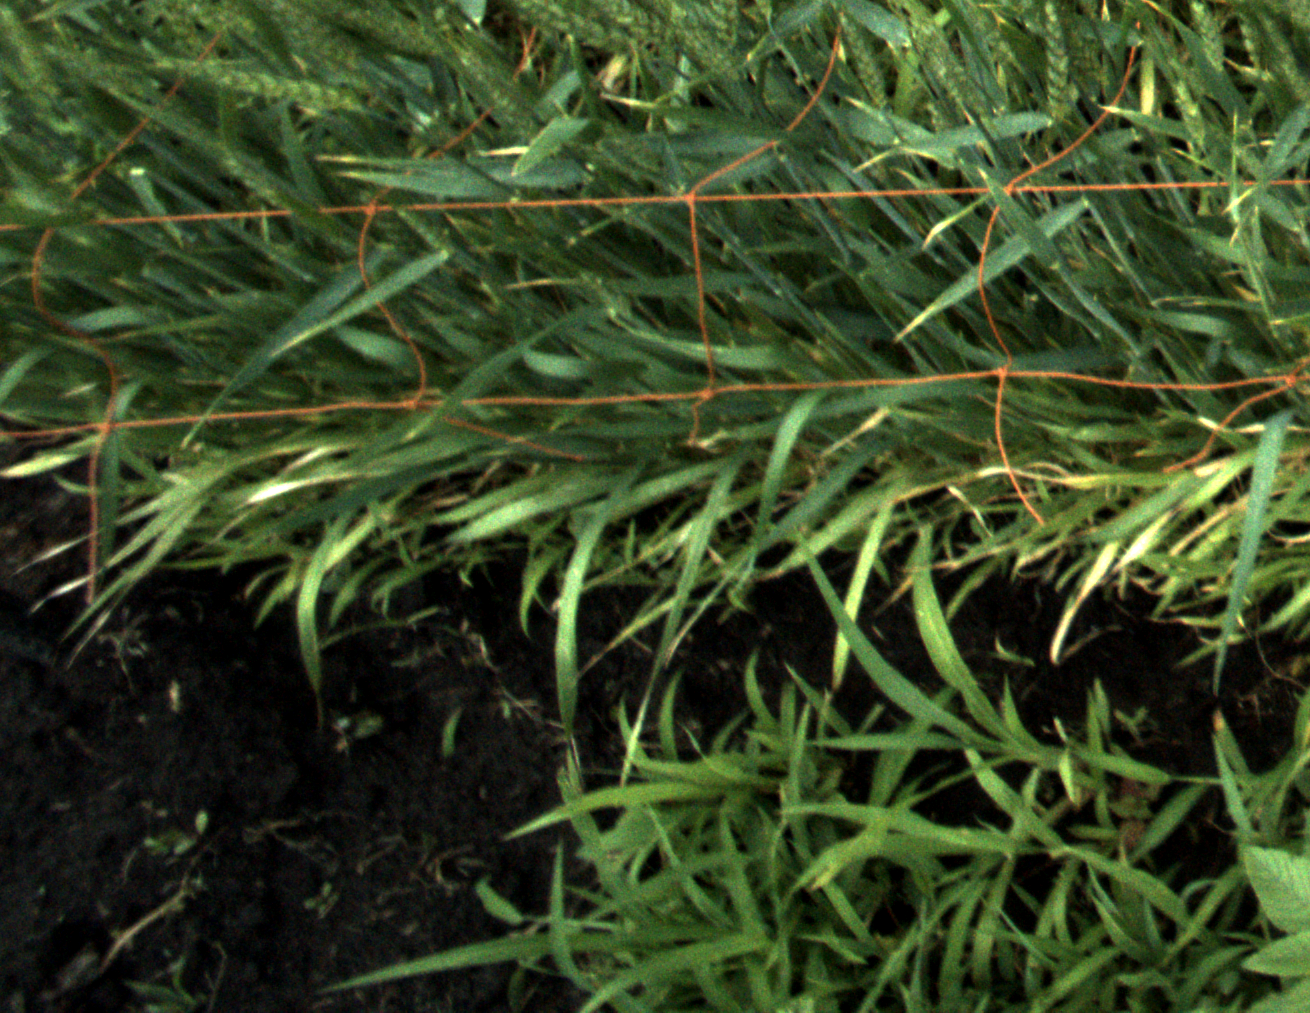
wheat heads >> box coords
[887,0,933,24]
[924,98,950,131]
[502,0,640,58]
[484,84,524,119]
[190,0,241,16]
[153,56,222,74]
[1191,0,1225,70]
[209,72,357,110]
[963,0,1015,58]
[1176,76,1207,138]
[1228,138,1268,182]
[1058,12,1106,78]
[219,145,282,207]
[150,0,213,57]
[1041,0,1068,113]
[247,0,361,68]
[1227,0,1262,63]
[397,206,447,250]
[134,0,225,35]
[837,10,887,111]
[1260,18,1310,110]
[695,0,740,49]
[0,7,61,105]
[549,0,678,44]
[42,42,143,96]
[356,184,419,261]
[1274,0,1310,36]
[458,55,494,92]
[674,18,744,81]
[346,7,435,49]
[921,31,967,97]
[602,119,661,174]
